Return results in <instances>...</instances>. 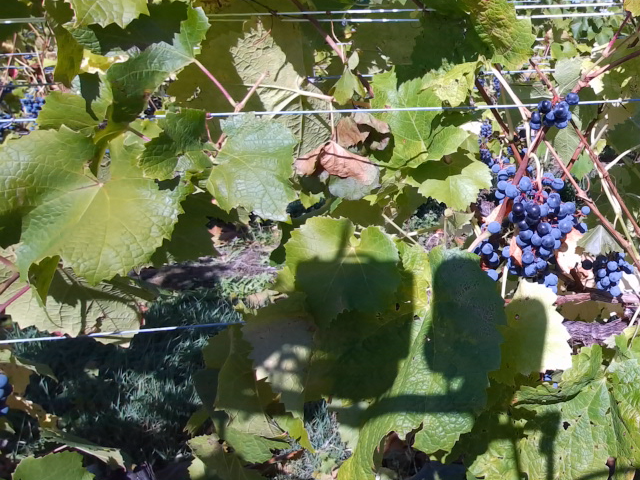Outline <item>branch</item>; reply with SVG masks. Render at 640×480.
Segmentation results:
<instances>
[{
    "label": "branch",
    "instance_id": "obj_2",
    "mask_svg": "<svg viewBox=\"0 0 640 480\" xmlns=\"http://www.w3.org/2000/svg\"><path fill=\"white\" fill-rule=\"evenodd\" d=\"M640 56V48H637L635 51L631 52L630 54L623 56V57H619L618 59H616L615 61L603 65L602 67H600L597 71H595L592 74L587 75L586 77H582L575 85L574 90L576 92H579L583 86L585 84H588L591 81L596 80L597 78L601 77L603 74H605L608 71H611L615 68H618L620 65L628 63L632 60H634L635 58Z\"/></svg>",
    "mask_w": 640,
    "mask_h": 480
},
{
    "label": "branch",
    "instance_id": "obj_4",
    "mask_svg": "<svg viewBox=\"0 0 640 480\" xmlns=\"http://www.w3.org/2000/svg\"><path fill=\"white\" fill-rule=\"evenodd\" d=\"M491 71L496 76L497 80L507 88V91L512 96V98L517 103L521 102L522 98L519 96L518 92L514 89V85L503 76L499 68L497 66H493L491 68Z\"/></svg>",
    "mask_w": 640,
    "mask_h": 480
},
{
    "label": "branch",
    "instance_id": "obj_5",
    "mask_svg": "<svg viewBox=\"0 0 640 480\" xmlns=\"http://www.w3.org/2000/svg\"><path fill=\"white\" fill-rule=\"evenodd\" d=\"M510 208H511V201L509 199H504L500 204L499 209L496 213V220L498 222H503Z\"/></svg>",
    "mask_w": 640,
    "mask_h": 480
},
{
    "label": "branch",
    "instance_id": "obj_6",
    "mask_svg": "<svg viewBox=\"0 0 640 480\" xmlns=\"http://www.w3.org/2000/svg\"><path fill=\"white\" fill-rule=\"evenodd\" d=\"M475 83H476V84L478 85V87L480 88L481 95H482V98H483V102H484L485 104H492V103H493V100H492V99L490 98V96H489V93H488V89H487L486 84H485V83H484L480 78H477V79L475 80Z\"/></svg>",
    "mask_w": 640,
    "mask_h": 480
},
{
    "label": "branch",
    "instance_id": "obj_3",
    "mask_svg": "<svg viewBox=\"0 0 640 480\" xmlns=\"http://www.w3.org/2000/svg\"><path fill=\"white\" fill-rule=\"evenodd\" d=\"M527 62L531 64L537 70V72L541 75L544 81L546 92L548 93L549 97L555 103H558L560 101V98L558 97L556 92L553 90L551 79L548 73L546 72V70L533 57H529L527 59Z\"/></svg>",
    "mask_w": 640,
    "mask_h": 480
},
{
    "label": "branch",
    "instance_id": "obj_1",
    "mask_svg": "<svg viewBox=\"0 0 640 480\" xmlns=\"http://www.w3.org/2000/svg\"><path fill=\"white\" fill-rule=\"evenodd\" d=\"M492 116L498 121L502 132L508 138L514 161L517 164H519L516 170V173L512 178V183L514 185H519V182L521 181L522 178L525 177V174L529 169L536 147L539 145V143L544 144L549 152L550 157L555 161V163L559 168V171L563 174L559 177V180L561 182H564L565 180L569 182L570 186L576 192V194L584 201V203L594 213V215L598 218V220L602 223V225L608 230L609 234L617 243L619 248L623 251V253L629 256L631 260L634 262V264L638 268H640V254L638 253L637 248L630 236L626 218L631 222L638 236H640V223L632 215L623 194L620 192L619 188L615 184V181L606 172V169L598 159L596 152L594 151V148L588 143V140L592 131L594 130L596 124L599 122V118L597 116H594L588 123V126L582 135L580 133V130L576 123L575 118L573 116H570L571 120L568 123L578 143L572 152L571 158L566 164H564L560 156L556 153V150L553 144L546 138V136L548 135V129L546 127H541L533 135V137L528 141L525 147V151L521 158L518 150L517 140L513 135V133L511 132V130L508 128V125L505 119L503 118V116L499 113V110L493 109ZM583 148L587 151L592 163L597 168V175H598L603 193L611 202V204L614 206L618 214L625 243L621 238V236L618 234V232L615 230V228L611 225L609 220L596 207L593 201L580 188L576 180L570 174L571 168L578 161V157Z\"/></svg>",
    "mask_w": 640,
    "mask_h": 480
}]
</instances>
